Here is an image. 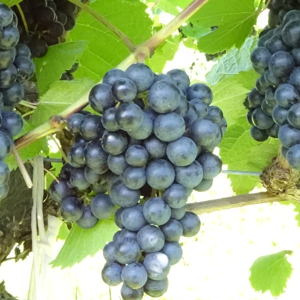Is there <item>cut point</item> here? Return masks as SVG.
<instances>
[{"label":"cut point","mask_w":300,"mask_h":300,"mask_svg":"<svg viewBox=\"0 0 300 300\" xmlns=\"http://www.w3.org/2000/svg\"><path fill=\"white\" fill-rule=\"evenodd\" d=\"M69 2H72L75 4L78 8L82 10H86L87 13H89L93 18L97 21H99L103 26L110 29L112 32H114L116 37H120V39L124 42V44L128 47L130 51H134L137 48V45L132 42L131 39H129L128 36H126L121 29H118L109 21L101 16L99 13L95 12L92 8H90L87 4L83 3L81 0H68Z\"/></svg>","instance_id":"obj_1"}]
</instances>
